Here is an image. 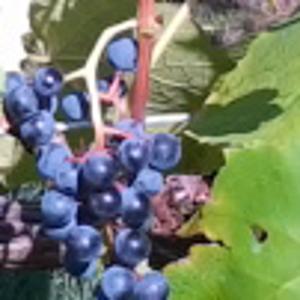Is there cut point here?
Returning a JSON list of instances; mask_svg holds the SVG:
<instances>
[{
	"mask_svg": "<svg viewBox=\"0 0 300 300\" xmlns=\"http://www.w3.org/2000/svg\"><path fill=\"white\" fill-rule=\"evenodd\" d=\"M136 26L137 20L134 17H129L128 19L108 25L100 33V36L90 52L89 59L83 63V67L81 69L70 70L64 74V80L66 82L84 78L81 89L88 100L91 119L93 120L103 122L100 99L95 90L101 57L113 36L121 32L133 30Z\"/></svg>",
	"mask_w": 300,
	"mask_h": 300,
	"instance_id": "cut-point-1",
	"label": "cut point"
}]
</instances>
